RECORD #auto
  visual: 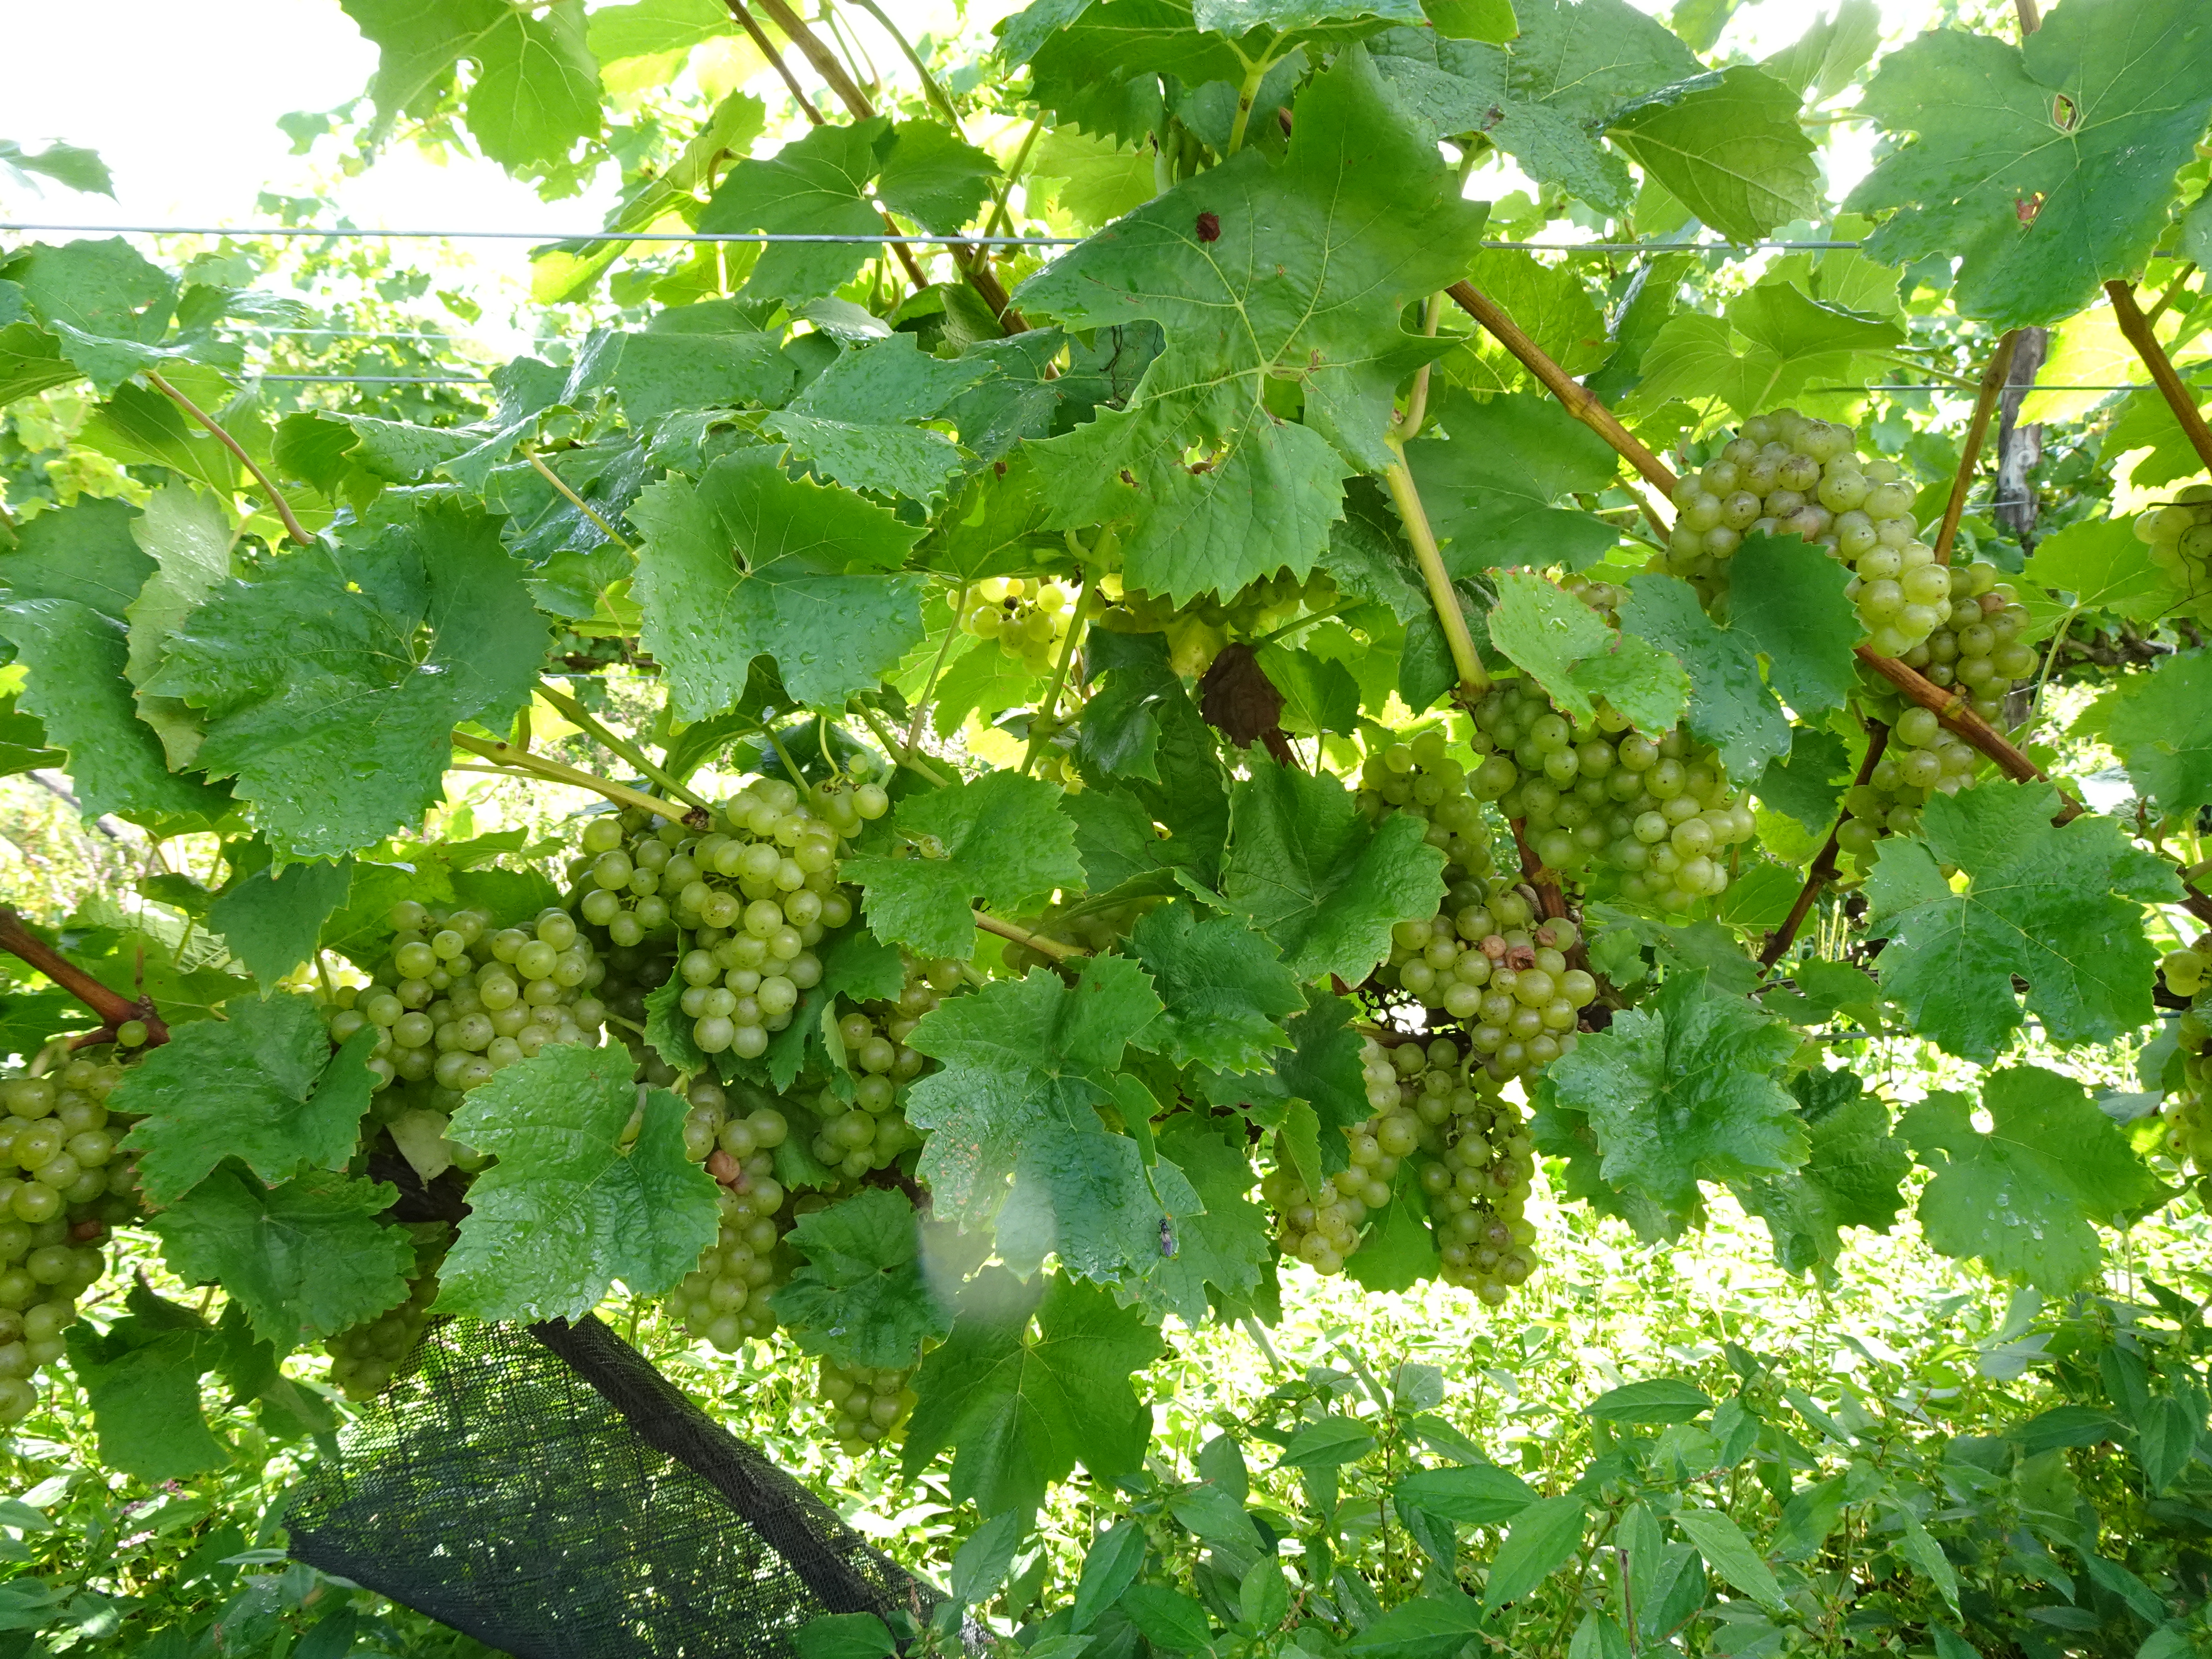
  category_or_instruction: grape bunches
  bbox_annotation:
[2132,484,2211,612]
[567,805,687,947]
[1472,919,1597,1082]
[1385,1039,1538,1306]
[371,901,605,1175]
[310,985,437,1142]
[1350,732,1497,918]
[1034,691,1090,795]
[324,1272,440,1402]
[777,1193,829,1267]
[1860,561,2039,797]
[946,576,1089,677]
[1466,672,1633,874]
[1554,570,1636,633]
[2161,950,2212,1155]
[569,901,682,1087]
[1386,877,1531,1019]
[892,835,943,861]
[665,778,852,1058]
[810,753,888,838]
[1085,572,1206,633]
[1196,574,1334,633]
[1262,1035,1438,1276]
[1605,725,1785,923]
[812,950,964,1178]
[817,1349,910,1458]
[1647,408,1952,658]
[1001,903,1144,989]
[1836,759,1926,879]
[0,1020,158,1424]
[620,1075,788,1353]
